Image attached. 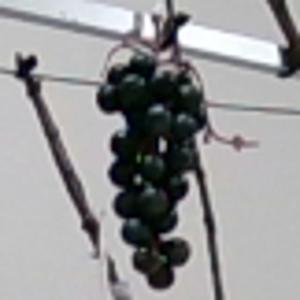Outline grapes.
Here are the masks:
<instances>
[{
    "instance_id": "grapes-1",
    "label": "grapes",
    "mask_w": 300,
    "mask_h": 300,
    "mask_svg": "<svg viewBox=\"0 0 300 300\" xmlns=\"http://www.w3.org/2000/svg\"><path fill=\"white\" fill-rule=\"evenodd\" d=\"M106 80L95 92V105L104 114L123 115L126 124L109 139L115 159L107 176L123 190L113 198L112 210L124 220L122 239L135 249L132 266L145 274L151 288L164 291L173 284L175 267L192 254L185 238L164 240L162 235L178 226L176 209L190 189L184 174L200 164L188 139L207 125L208 103L181 63L159 64L149 47L134 50L128 66H110Z\"/></svg>"
}]
</instances>
